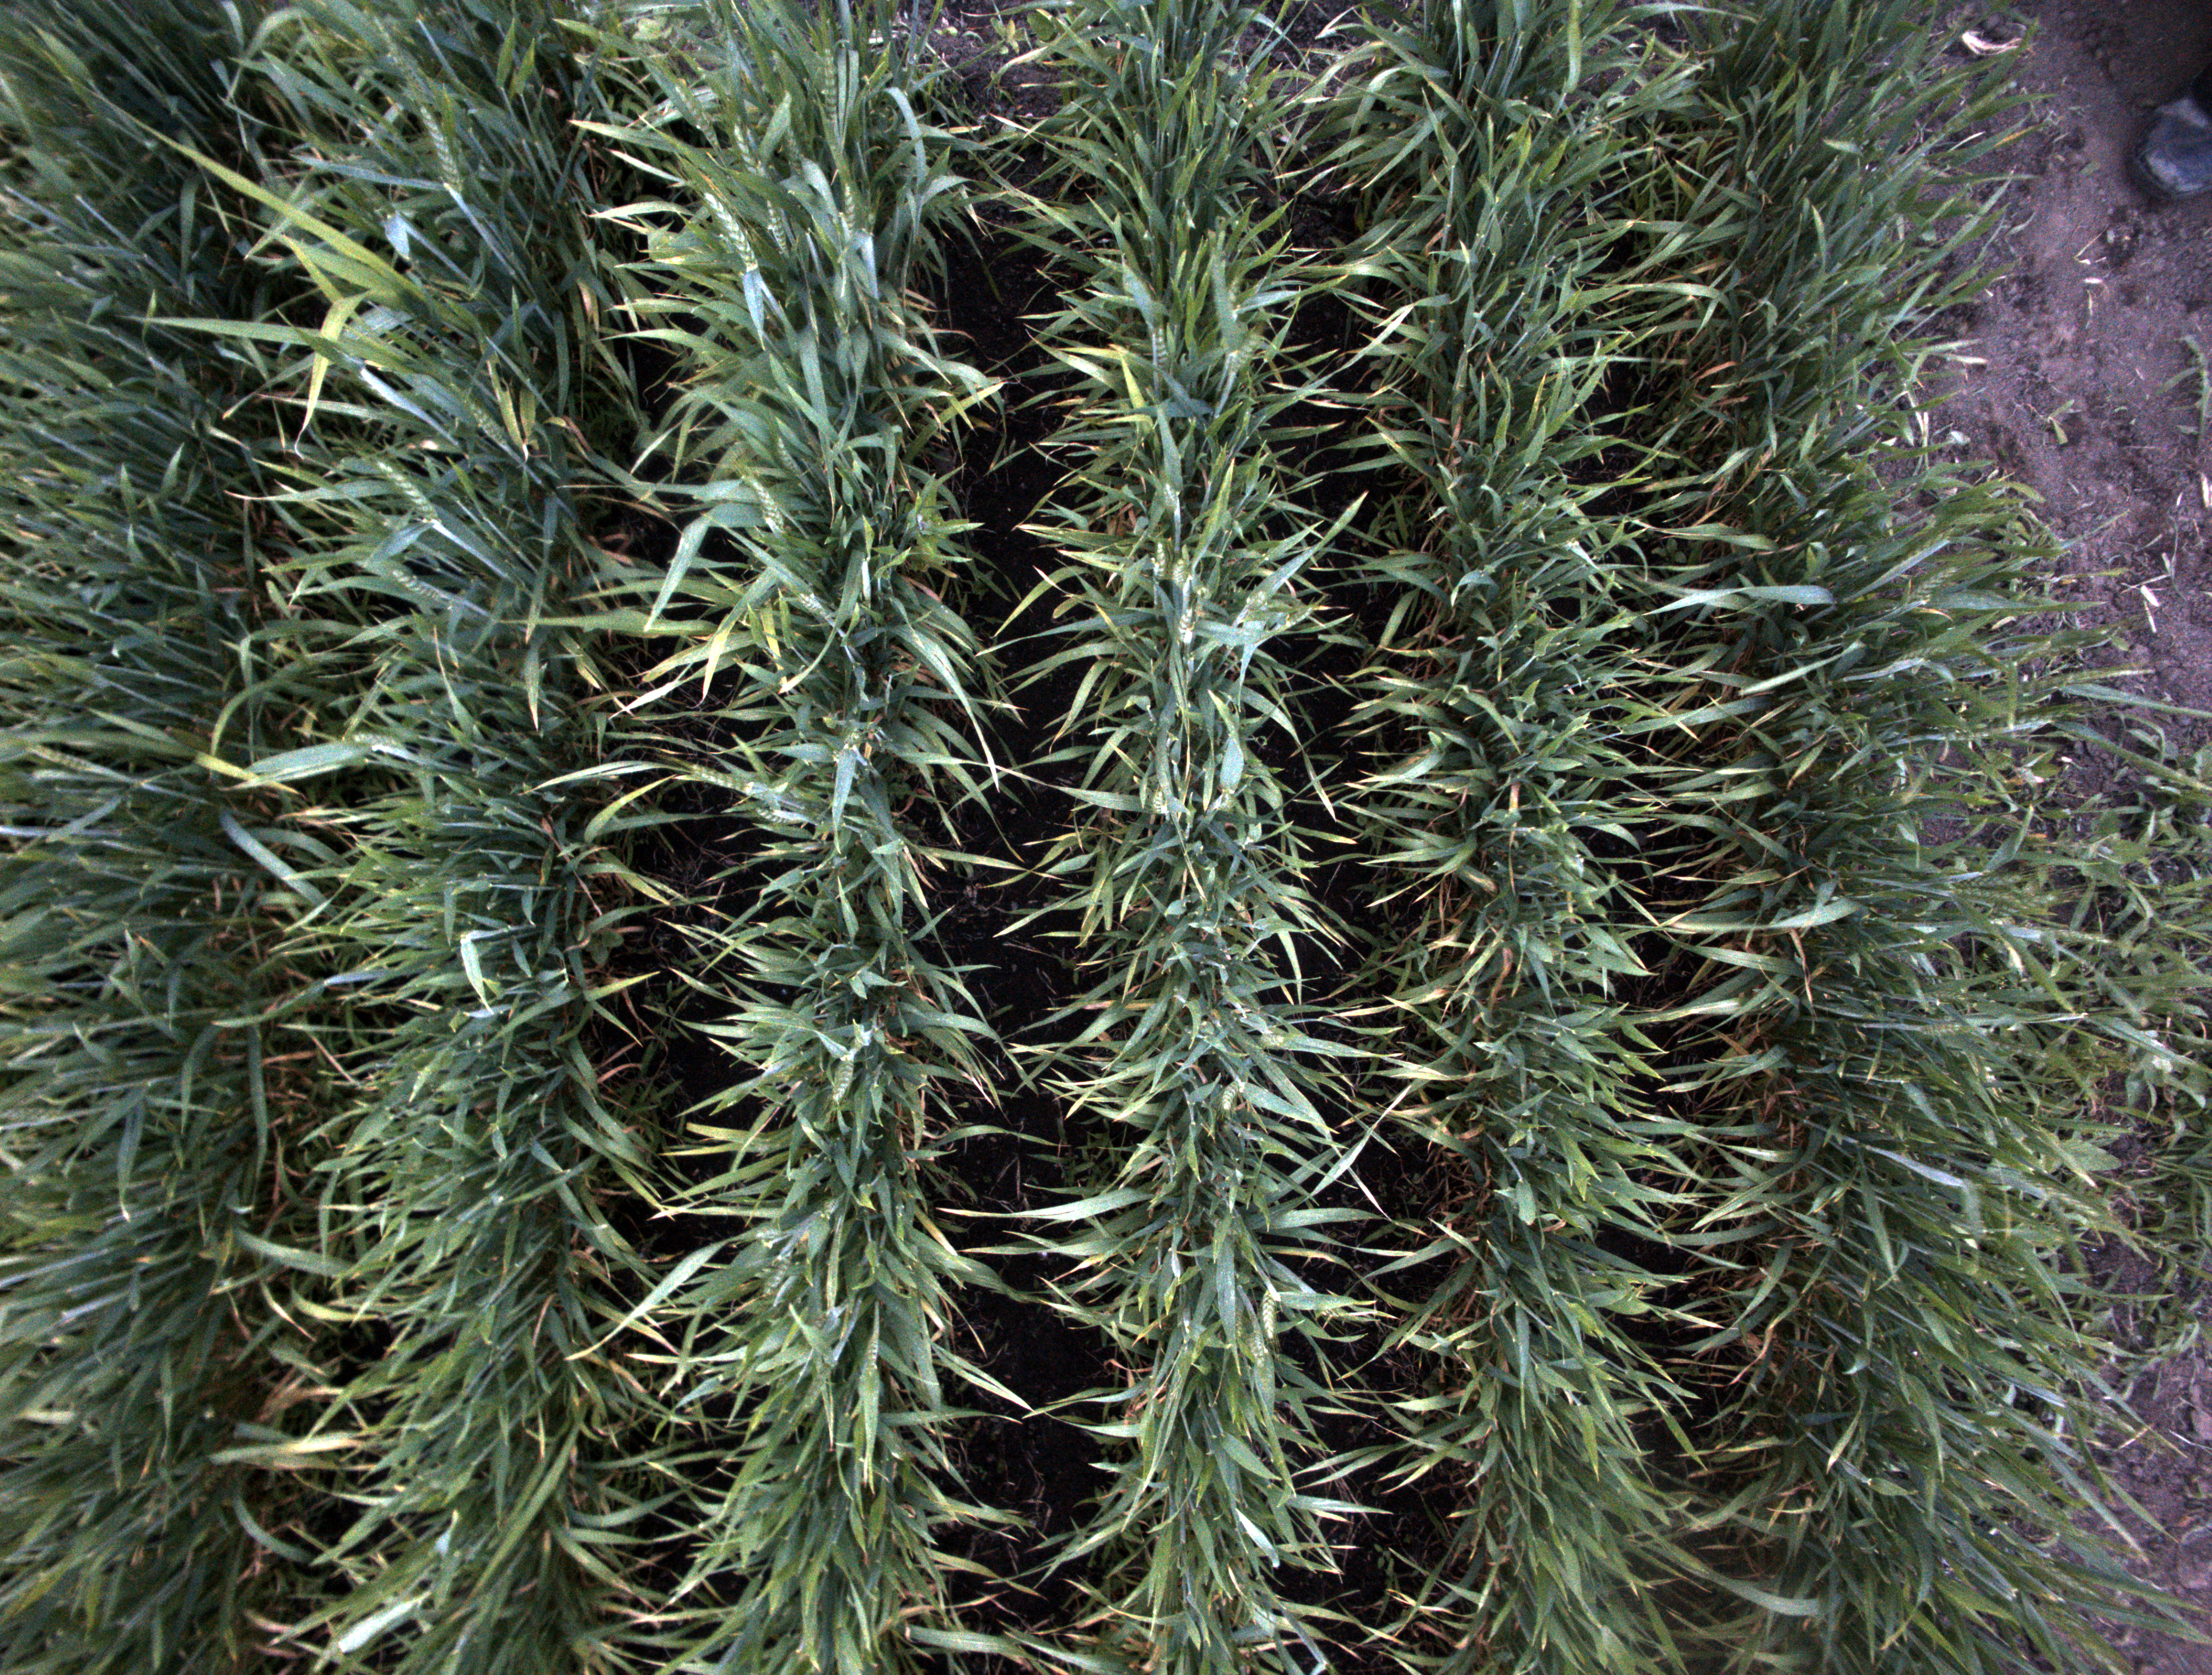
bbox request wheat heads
[1998,1035,2049,1060]
[1954,729,1989,743]
[1919,1020,1962,1036]
[1162,480,1177,512]
[862,1330,879,1375]
[829,1053,852,1104]
[29,746,97,773]
[1234,1305,1244,1337]
[1924,989,1966,1003]
[2020,1546,2102,1600]
[332,153,395,214]
[388,569,442,602]
[766,197,789,253]
[823,47,838,120]
[796,590,826,616]
[1247,1329,1264,1367]
[760,1251,795,1300]
[1138,1252,1159,1285]
[1229,334,1263,374]
[754,1224,783,1243]
[1920,336,1979,354]
[0,1106,63,1124]
[1953,355,1990,364]
[2093,567,2131,576]
[1951,873,2021,889]
[1171,556,1186,584]
[1257,1032,1284,1048]
[1927,82,2009,143]
[1877,1071,1913,1085]
[1993,894,2056,917]
[373,14,429,95]
[349,731,398,751]
[2018,640,2051,666]
[1154,326,1170,372]
[673,83,719,147]
[2030,1179,2101,1218]
[1226,277,1242,308]
[2028,666,2155,693]
[1971,1250,2027,1280]
[419,102,463,193]
[1247,591,1267,610]
[1262,1290,1274,1341]
[1895,645,1949,662]
[781,121,804,175]
[1903,526,1954,563]
[1176,605,1193,639]
[1879,199,1898,222]
[821,1197,840,1218]
[2063,1394,2136,1439]
[2057,929,2112,945]
[705,3,728,45]
[843,727,862,747]
[802,1366,831,1410]
[1908,566,1957,604]
[1221,1080,1239,1112]
[754,804,799,825]
[1232,520,1243,539]
[2038,926,2057,959]
[468,403,507,449]
[1989,706,2086,729]
[689,762,746,793]
[1154,792,1163,815]
[2055,1614,2123,1675]
[1209,1214,1239,1237]
[1154,540,1167,583]
[1196,586,1209,610]
[750,477,785,530]
[776,434,802,476]
[843,180,856,237]
[376,462,439,521]
[1219,796,1229,808]
[1287,607,1312,627]
[1953,888,2021,910]
[733,120,768,178]
[702,190,757,267]
[717,231,736,255]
